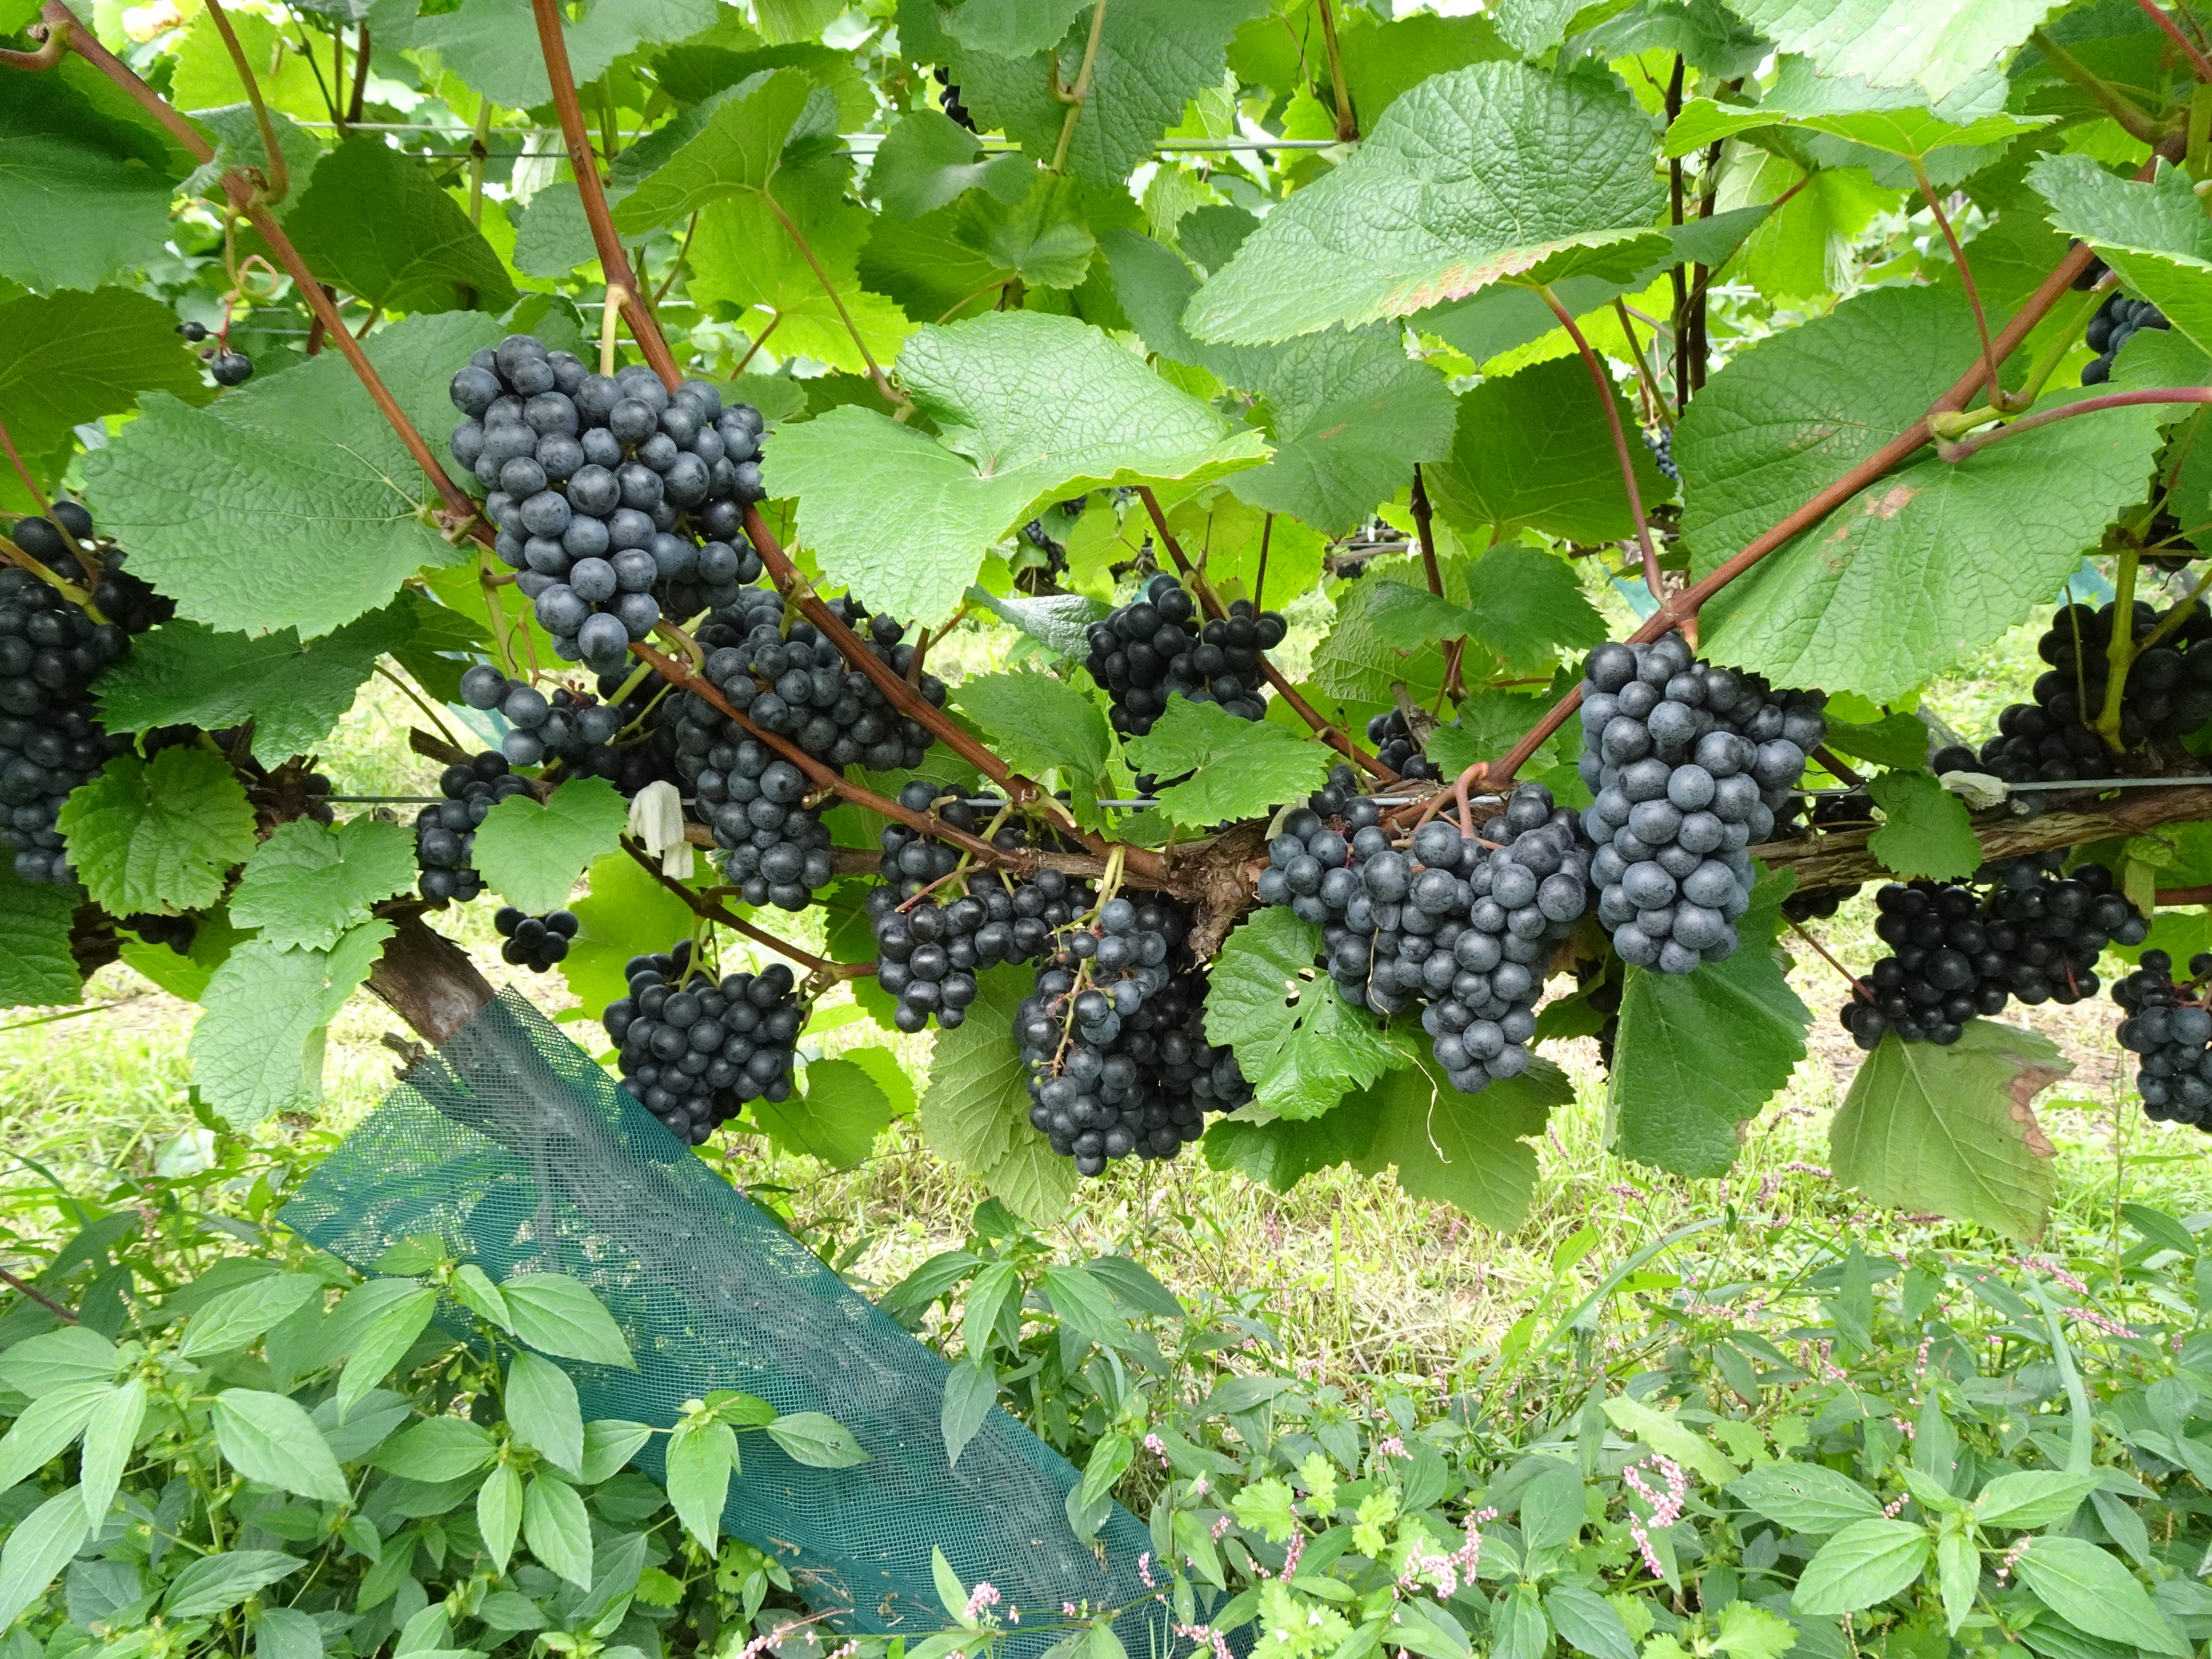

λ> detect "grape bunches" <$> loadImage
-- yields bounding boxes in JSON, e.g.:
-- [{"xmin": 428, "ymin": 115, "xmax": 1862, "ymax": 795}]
[
  {"xmin": 2117, "ymin": 475, "xmax": 2209, "ymax": 574},
  {"xmin": 450, "ymin": 334, "xmax": 777, "ymax": 675},
  {"xmin": 2069, "ymin": 235, "xmax": 2173, "ymax": 387},
  {"xmin": 1115, "ymin": 973, "xmax": 1204, "ymax": 1160},
  {"xmin": 303, "ymin": 773, "xmax": 334, "ymax": 828},
  {"xmin": 1192, "ymin": 1008, "xmax": 1255, "ymax": 1123},
  {"xmin": 1840, "ymin": 862, "xmax": 2019, "ymax": 1048},
  {"xmin": 1013, "ymin": 899, "xmax": 1183, "ymax": 1177},
  {"xmin": 865, "ymin": 780, "xmax": 1098, "ymax": 1034},
  {"xmin": 1086, "ymin": 576, "xmax": 1289, "ymax": 746},
  {"xmin": 1367, "ymin": 705, "xmax": 1444, "ymax": 783},
  {"xmin": 662, "ymin": 586, "xmax": 947, "ymax": 912},
  {"xmin": 588, "ymin": 643, "xmax": 699, "ymax": 798},
  {"xmin": 1984, "ymin": 844, "xmax": 2147, "ymax": 1005},
  {"xmin": 179, "ymin": 321, "xmax": 252, "ymax": 384},
  {"xmin": 1761, "ymin": 787, "xmax": 1882, "ymax": 923},
  {"xmin": 0, "ymin": 503, "xmax": 159, "ymax": 893},
  {"xmin": 416, "ymin": 751, "xmax": 532, "ymax": 903},
  {"xmin": 1932, "ymin": 599, "xmax": 2212, "ymax": 816},
  {"xmin": 1565, "ymin": 961, "xmax": 1623, "ymax": 1073},
  {"xmin": 1421, "ymin": 781, "xmax": 1598, "ymax": 1093},
  {"xmin": 2110, "ymin": 948, "xmax": 2212, "ymax": 1134},
  {"xmin": 1255, "ymin": 767, "xmax": 1464, "ymax": 1015},
  {"xmin": 116, "ymin": 725, "xmax": 231, "ymax": 955},
  {"xmin": 462, "ymin": 664, "xmax": 624, "ymax": 767},
  {"xmin": 496, "ymin": 907, "xmax": 579, "ymax": 973},
  {"xmin": 1577, "ymin": 634, "xmax": 1829, "ymax": 973},
  {"xmin": 603, "ymin": 941, "xmax": 813, "ymax": 1164}
]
